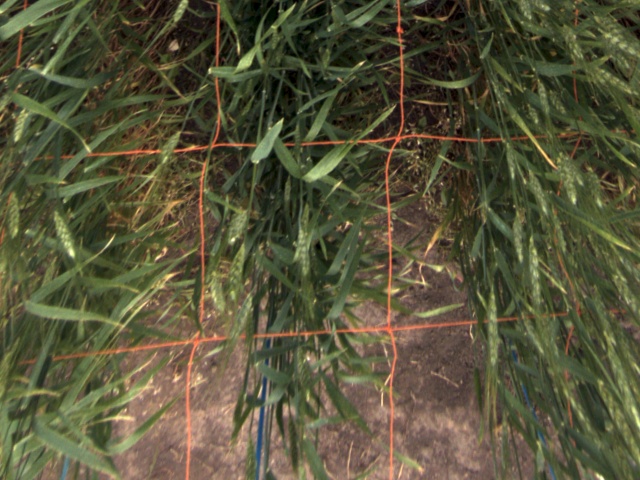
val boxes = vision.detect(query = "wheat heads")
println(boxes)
[557,156,580,202]
[520,0,530,18]
[203,275,227,304]
[223,296,255,344]
[600,69,629,97]
[521,312,544,355]
[527,244,538,297]
[486,287,499,363]
[297,230,310,275]
[528,172,548,210]
[589,171,603,208]
[509,215,522,257]
[227,212,250,243]
[9,193,23,240]
[598,383,631,459]
[603,339,630,391]
[228,249,246,285]
[610,275,640,310]
[160,134,183,157]
[552,95,567,116]
[52,210,75,256]
[549,209,569,253]
[599,12,621,37]
[608,37,637,54]
[558,384,590,440]
[176,0,191,22]
[528,105,537,123]
[536,80,549,110]
[563,23,587,61]
[14,112,31,140]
